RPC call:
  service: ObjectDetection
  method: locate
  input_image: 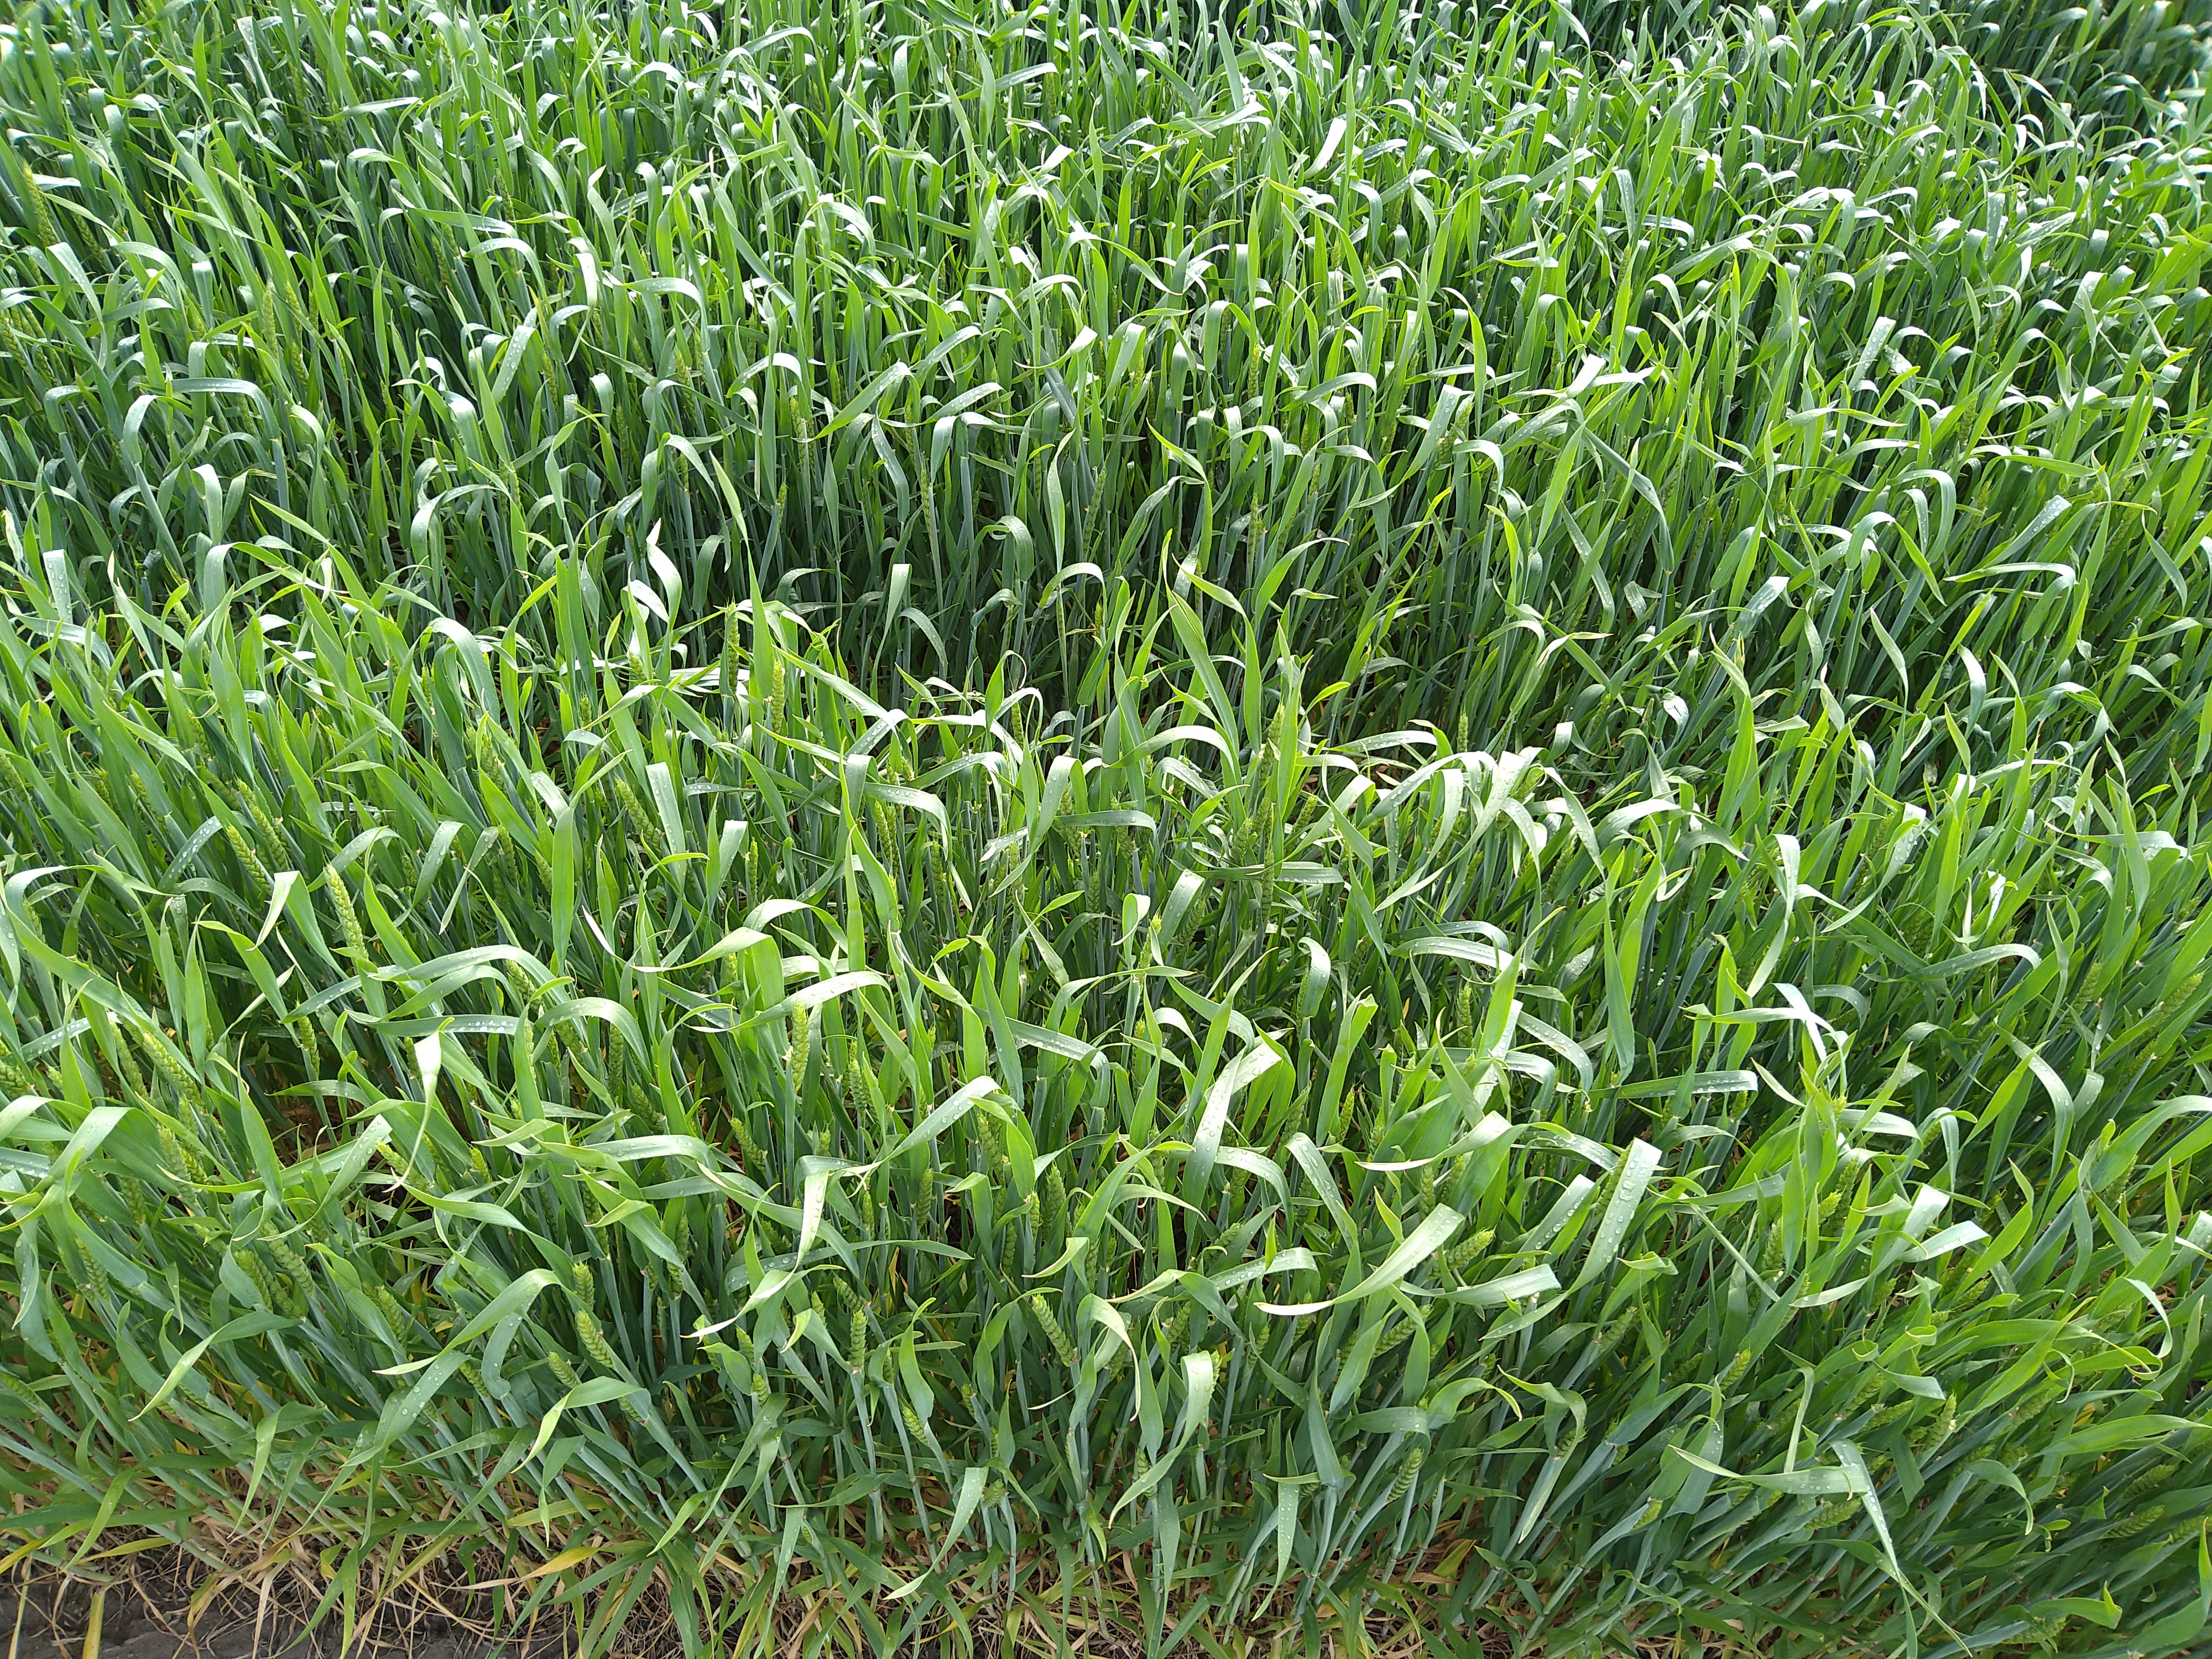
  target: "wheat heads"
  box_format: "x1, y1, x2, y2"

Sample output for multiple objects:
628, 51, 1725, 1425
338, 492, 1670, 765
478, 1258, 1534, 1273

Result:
234, 775, 258, 811
2152, 1516, 2212, 1546
1349, 934, 1373, 980
1062, 784, 1081, 856
2178, 898, 2200, 924
58, 1245, 93, 1301
500, 457, 509, 518
1331, 239, 1341, 270
730, 1115, 768, 1177
1044, 71, 1055, 106
1167, 1300, 1190, 1342
1732, 1089, 1748, 1118
2037, 832, 2054, 913
0, 1065, 27, 1102
674, 353, 697, 413
2109, 478, 2134, 535
187, 710, 211, 764
1253, 706, 1284, 797
1295, 1291, 1309, 1338
2157, 731, 2179, 784
1136, 914, 1162, 979
810, 1289, 824, 1321
307, 1203, 327, 1240
182, 1387, 207, 1407
0, 755, 49, 857
1195, 566, 1201, 610
966, 43, 976, 92
1134, 227, 1142, 255
927, 1024, 937, 1048
1336, 1330, 1362, 1395
1134, 352, 1145, 384
1254, 799, 1271, 852
1256, 849, 1273, 926
234, 1252, 274, 1311
1147, 379, 1154, 417
1261, 806, 1274, 863
157, 1128, 194, 1200
178, 1151, 210, 1183
1551, 345, 1563, 390
510, 1097, 524, 1119
542, 1028, 557, 1068
2121, 1468, 2174, 1496
1835, 1157, 1862, 1215
2103, 1508, 2162, 1537
1456, 712, 1469, 777
1345, 391, 1356, 425
1861, 1400, 1913, 1433
256, 370, 262, 387
420, 664, 440, 716
1663, 463, 1680, 496
1997, 1448, 2023, 1473
832, 369, 840, 403
175, 1102, 198, 1139
572, 1260, 594, 1311
982, 1477, 1001, 1507
1865, 1429, 1927, 1474
421, 1400, 436, 1422
1245, 496, 1257, 566
1692, 500, 1713, 555
915, 1168, 933, 1227
498, 172, 514, 228
522, 1021, 537, 1085
490, 856, 512, 921
2084, 1144, 2106, 1185
420, 1135, 457, 1184
1302, 424, 1318, 458
745, 839, 758, 918
1516, 1258, 1531, 1315
1815, 260, 1824, 292
537, 1178, 566, 1243
44, 1068, 64, 1093
1375, 1304, 1432, 1359
1132, 1021, 1146, 1079
1442, 1158, 1464, 1208
1481, 1351, 1495, 1382
1110, 1325, 1132, 1376
264, 1228, 312, 1297
1084, 464, 1106, 554
362, 756, 386, 813
989, 1431, 996, 1456
1397, 1060, 1416, 1104
1296, 970, 1311, 1038
1112, 289, 1117, 332
1387, 231, 1396, 263
1582, 692, 1611, 743
1616, 245, 1632, 300
1624, 501, 1652, 562
772, 661, 785, 741
478, 729, 509, 803
861, 1192, 873, 1240
1762, 364, 1774, 405
1220, 1119, 1237, 1178
139, 1031, 201, 1097
884, 767, 903, 823
1024, 266, 1030, 305
594, 330, 608, 371
1098, 351, 1105, 393
1046, 1162, 1056, 1240
1553, 1428, 1582, 1456
1602, 1314, 1633, 1352
1289, 798, 1318, 857
1718, 1349, 1751, 1393
1605, 1421, 1625, 1462
990, 1185, 1009, 1224
1721, 494, 1737, 545
883, 1207, 891, 1243
1342, 851, 1359, 864
1137, 1449, 1153, 1496
1233, 814, 1254, 858
240, 396, 258, 434
750, 1371, 767, 1404
1773, 1400, 1802, 1430
762, 1220, 790, 1256
1923, 1121, 1942, 1151
1546, 840, 1575, 901
904, 413, 917, 459
1916, 37, 1925, 62
133, 773, 167, 830
403, 1037, 420, 1078
1259, 520, 1265, 551
658, 1295, 665, 1335
646, 1226, 662, 1292
1009, 843, 1023, 911
1249, 345, 1260, 401
1057, 1163, 1070, 1223
1776, 487, 1785, 520
380, 381, 388, 406
841, 1040, 856, 1097
818, 1131, 832, 1158
113, 441, 121, 457
20, 313, 53, 378
1357, 99, 1371, 126
1776, 1273, 1810, 1338
1073, 1208, 1085, 1227
1022, 1190, 1038, 1269
375, 1285, 407, 1352
1913, 920, 1949, 960
1451, 1163, 1466, 1199
1740, 849, 1777, 895
432, 238, 449, 290
1850, 814, 1893, 895
1950, 1281, 1989, 1314
710, 293, 716, 323
1950, 1444, 1994, 1491
1104, 1236, 1117, 1269
1869, 1279, 1897, 1310
194, 316, 207, 343
27, 177, 60, 246
1198, 1224, 1240, 1271
558, 1020, 581, 1060
627, 654, 643, 694
1565, 586, 1593, 633
948, 34, 955, 70
512, 462, 520, 508
332, 105, 354, 152
633, 337, 645, 370
848, 1058, 867, 1114
615, 776, 662, 855
872, 1351, 892, 1383
1277, 527, 1288, 558
1456, 990, 1471, 1054
147, 203, 169, 252
1435, 1229, 1494, 1276
804, 420, 815, 474
1004, 608, 1015, 648
1434, 814, 1465, 868
1084, 878, 1103, 940
1765, 114, 1777, 161
1177, 900, 1206, 952
725, 608, 737, 690
1389, 188, 1405, 235
120, 1175, 147, 1220
2115, 1049, 2152, 1093
1121, 839, 1135, 859
834, 1274, 863, 1315
670, 1218, 687, 1288
683, 449, 689, 485
576, 695, 593, 730
291, 69, 308, 122
1758, 1490, 1781, 1509
1265, 274, 1279, 311
630, 1086, 662, 1127
996, 824, 1005, 892
1956, 404, 1976, 450
253, 1254, 300, 1319
2106, 1155, 2137, 1206
1467, 850, 1483, 883
263, 293, 275, 346
147, 1394, 175, 1415
1611, 437, 1629, 483
2135, 972, 2203, 1045
2000, 1390, 2051, 1437
1818, 1194, 1842, 1224
226, 827, 276, 897
1251, 1319, 1270, 1366
546, 1351, 580, 1388
378, 1143, 432, 1188
1188, 1333, 1199, 1359
26, 256, 44, 287
89, 770, 113, 809
1662, 1350, 1702, 1392
1056, 416, 1071, 460
1968, 497, 1986, 544
1, 1378, 40, 1405
875, 799, 896, 873
978, 766, 997, 838
1924, 1394, 1957, 1460
291, 345, 307, 390
852, 1312, 867, 1375
1660, 1092, 1677, 1126
735, 1325, 754, 1368
1111, 794, 1128, 842
1899, 38, 1905, 66
1730, 1483, 1751, 1506
642, 246, 652, 282
1756, 1217, 1788, 1298
621, 1398, 643, 1423
920, 469, 931, 541
1364, 251, 1371, 271
1175, 758, 1188, 797
1419, 1163, 1435, 1217
1899, 979, 1919, 1005
929, 840, 944, 895
695, 341, 703, 380
747, 315, 757, 363
1379, 420, 1397, 457
1897, 909, 1927, 948
294, 1005, 319, 1074
1802, 1501, 1858, 1528
993, 430, 1001, 458
546, 360, 558, 406
580, 1176, 606, 1255
1087, 1232, 1100, 1291
1032, 439, 1042, 503
2157, 529, 2168, 551
12, 303, 27, 353
1831, 1097, 1847, 1118
883, 352, 889, 372
608, 1022, 624, 1103
738, 1283, 746, 1310
971, 1102, 1008, 1181
1057, 600, 1064, 651
1331, 1088, 1356, 1144
24, 899, 44, 944
381, 461, 396, 501
2082, 496, 2112, 554
1369, 1171, 1386, 1207
322, 861, 367, 965
1393, 1449, 1424, 1501
591, 312, 606, 332
1210, 1351, 1220, 1392
1427, 402, 1472, 471
940, 261, 947, 303
883, 804, 896, 863
904, 1409, 929, 1444
23, 303, 66, 380
1001, 1223, 1014, 1274
1587, 996, 1607, 1036
500, 957, 538, 1010
917, 1082, 929, 1122
1056, 329, 1062, 356
98, 1023, 148, 1101
286, 287, 304, 336
2001, 1616, 2066, 1644
0, 310, 34, 371
615, 405, 629, 477
1594, 1143, 1634, 1216
595, 784, 608, 820
1637, 1503, 1662, 1528
1428, 813, 1444, 846
472, 1147, 493, 1199
1854, 148, 1873, 196
2057, 967, 2102, 1037
788, 403, 808, 469
310, 293, 318, 333
1010, 700, 1022, 747
250, 807, 290, 871
722, 952, 736, 1001
1400, 351, 1420, 405
963, 1384, 973, 1415
2108, 516, 2132, 554
533, 848, 553, 893
1143, 1127, 1163, 1186
1483, 243, 1503, 298
401, 853, 421, 908
1641, 850, 1653, 873
1909, 334, 1920, 366
76, 1239, 108, 1296
495, 823, 518, 893
73, 210, 108, 270
1977, 928, 2017, 978
1030, 1293, 1075, 1368
1836, 1370, 1890, 1415
778, 482, 784, 524
787, 1004, 808, 1093
1992, 302, 2014, 352
439, 31, 455, 63
1307, 466, 1319, 504
1371, 1123, 1385, 1166
1282, 1091, 1308, 1158
1233, 129, 1241, 169
461, 1365, 490, 1394
1221, 306, 1229, 351
1298, 1176, 1318, 1230
1425, 520, 1443, 574
810, 84, 822, 128
574, 1312, 611, 1365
